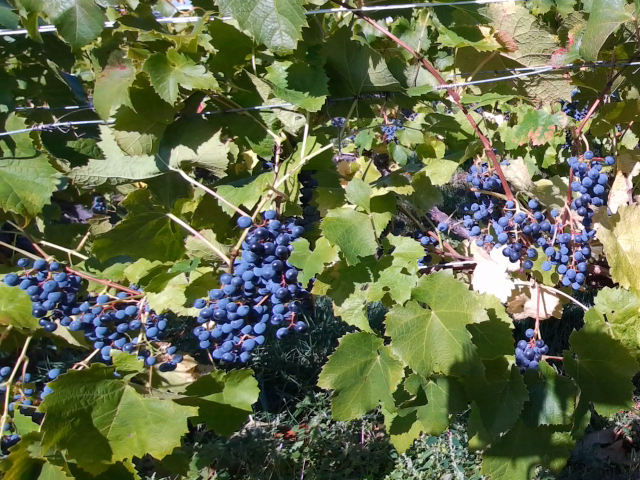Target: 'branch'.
<instances>
[{
  "instance_id": "obj_2",
  "label": "branch",
  "mask_w": 640,
  "mask_h": 480,
  "mask_svg": "<svg viewBox=\"0 0 640 480\" xmlns=\"http://www.w3.org/2000/svg\"><path fill=\"white\" fill-rule=\"evenodd\" d=\"M23 234L26 238V240L29 242L30 245H32L44 258L48 259L49 261L54 262L55 264H57L59 267H61L62 269L68 271L70 274L75 275V276H79L83 279H86L90 282L96 283V284H101L103 286H109L112 288H116L118 290L124 291V292H129L131 294H134L137 297H142L143 293L139 292L138 290H133L130 289L127 286L115 283V282H111V281H106L104 279H99V278H95L92 277L88 274H85L84 272L81 271H77L74 270L72 267H70L69 265L63 263L61 260H59L58 258H56L55 256H52L51 254L47 253L44 251V249L37 243L35 242L32 237L30 236L29 232L27 229L23 230Z\"/></svg>"
},
{
  "instance_id": "obj_4",
  "label": "branch",
  "mask_w": 640,
  "mask_h": 480,
  "mask_svg": "<svg viewBox=\"0 0 640 480\" xmlns=\"http://www.w3.org/2000/svg\"><path fill=\"white\" fill-rule=\"evenodd\" d=\"M354 15L362 18L363 20L367 21L374 29H376L377 31H379L380 33H383L384 35H386L387 37H389L392 41H394L395 43L403 46L406 50H408L413 56H415L422 64H424V67L442 84V85H446L447 81L433 68L431 67V65L428 63V61L416 50H414L410 45H408L405 41L401 40L400 38H398L397 36L393 35L390 31H388L387 29L383 28L382 26L378 25L373 19H371L368 15L364 14V13H353Z\"/></svg>"
},
{
  "instance_id": "obj_8",
  "label": "branch",
  "mask_w": 640,
  "mask_h": 480,
  "mask_svg": "<svg viewBox=\"0 0 640 480\" xmlns=\"http://www.w3.org/2000/svg\"><path fill=\"white\" fill-rule=\"evenodd\" d=\"M568 178H569V181L567 182V198H568L567 205L571 206L572 189H570V185H571V182L573 181V170H572V168H569Z\"/></svg>"
},
{
  "instance_id": "obj_9",
  "label": "branch",
  "mask_w": 640,
  "mask_h": 480,
  "mask_svg": "<svg viewBox=\"0 0 640 480\" xmlns=\"http://www.w3.org/2000/svg\"><path fill=\"white\" fill-rule=\"evenodd\" d=\"M333 3H334V4H336V5H339V6H341V7L347 8V9H351V8H353V5H352V4H349V3L343 2V1H341V0H333Z\"/></svg>"
},
{
  "instance_id": "obj_1",
  "label": "branch",
  "mask_w": 640,
  "mask_h": 480,
  "mask_svg": "<svg viewBox=\"0 0 640 480\" xmlns=\"http://www.w3.org/2000/svg\"><path fill=\"white\" fill-rule=\"evenodd\" d=\"M280 141L281 138L280 137H276L275 138V168L273 171V187L275 189V198H276V218L280 217L281 214V206H282V197L280 195V185H282L285 181H287L290 176L305 162H307L308 160H310L311 158L322 154L324 152H326L327 150H329L330 148L334 147L335 145L338 144L337 140H333L331 142H329L328 144H326L325 146H323L322 148H319L309 154H307L306 156L302 157L298 162H296L287 172L286 174L278 179V174L280 171Z\"/></svg>"
},
{
  "instance_id": "obj_3",
  "label": "branch",
  "mask_w": 640,
  "mask_h": 480,
  "mask_svg": "<svg viewBox=\"0 0 640 480\" xmlns=\"http://www.w3.org/2000/svg\"><path fill=\"white\" fill-rule=\"evenodd\" d=\"M447 92L453 97V99L455 100V103L457 105V107L461 110V112L464 114L465 118L467 119V121L471 124V126L473 127V129L475 130L481 144L485 147V149L488 152L490 161L494 164V166L496 167L497 170V174L499 176V178L502 181V186L505 190L506 193V197L508 201H513L514 197H513V193L511 192L508 183H507V178L505 177L501 165L499 163V161L495 158L494 153L492 152V147L488 144V142L485 140V137L483 136L482 131L480 130L478 124L473 120V118L471 117V115L469 114V112L467 111V109L465 108V106L462 104V102L460 101V98L458 96V94L451 88L448 89Z\"/></svg>"
},
{
  "instance_id": "obj_7",
  "label": "branch",
  "mask_w": 640,
  "mask_h": 480,
  "mask_svg": "<svg viewBox=\"0 0 640 480\" xmlns=\"http://www.w3.org/2000/svg\"><path fill=\"white\" fill-rule=\"evenodd\" d=\"M272 196H273V192L272 191H269L266 194V196L263 198L262 202L258 205L256 210L252 213V215L250 217L251 221H254L257 218V216L262 211V209L268 204V201L271 199Z\"/></svg>"
},
{
  "instance_id": "obj_5",
  "label": "branch",
  "mask_w": 640,
  "mask_h": 480,
  "mask_svg": "<svg viewBox=\"0 0 640 480\" xmlns=\"http://www.w3.org/2000/svg\"><path fill=\"white\" fill-rule=\"evenodd\" d=\"M627 69H628V67H623L620 71H618L615 75H613V77L611 78L609 83L599 93V95L597 97V100L595 101L594 105L589 109L587 114L584 116V119L579 123L578 127L571 134V137L574 138V144H573V147H572V150H571V155L572 156H576V147H577V144H578V135H579V133L582 131L583 127L587 124V121L591 118L593 113L598 109V107L601 104L602 99L605 96V94L614 86V84L618 80V77L622 73L627 71Z\"/></svg>"
},
{
  "instance_id": "obj_6",
  "label": "branch",
  "mask_w": 640,
  "mask_h": 480,
  "mask_svg": "<svg viewBox=\"0 0 640 480\" xmlns=\"http://www.w3.org/2000/svg\"><path fill=\"white\" fill-rule=\"evenodd\" d=\"M250 232H251V228H250V227H247V228L244 230V232L239 236L238 241L236 242V244H235V246H234V249H233V251H232V256H231V258H230V260H229V264H228V272H229V273H232V272H233V266H234V263H235V261H236V259H237L238 251H239V249H240V247H241V245H242V243H243L244 239L248 236V234H249Z\"/></svg>"
}]
</instances>
